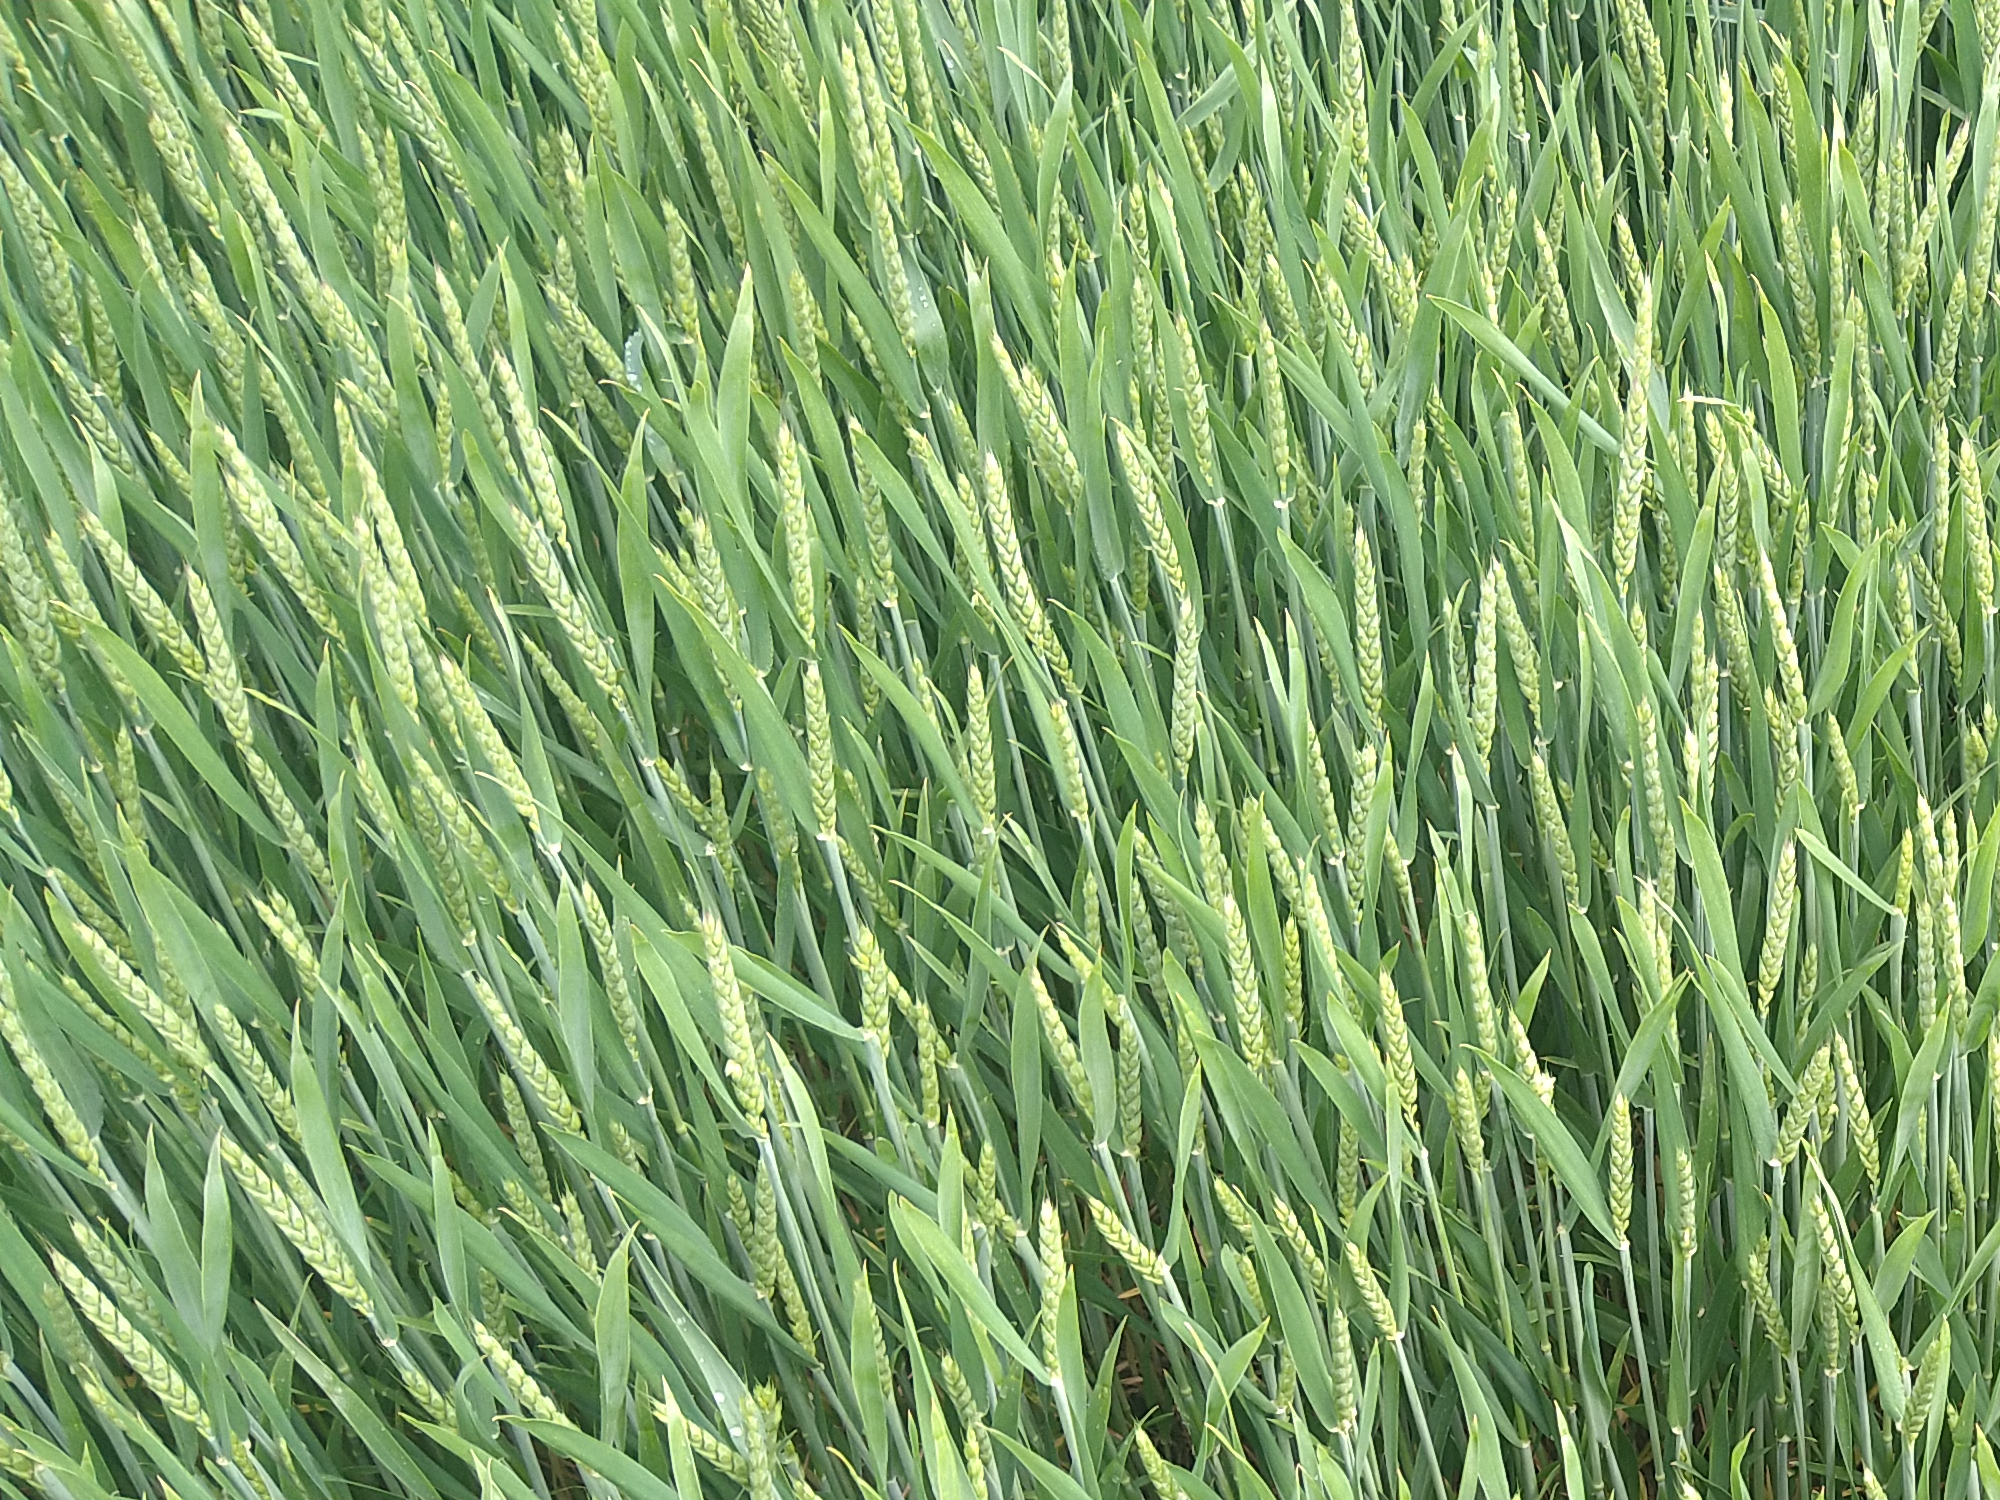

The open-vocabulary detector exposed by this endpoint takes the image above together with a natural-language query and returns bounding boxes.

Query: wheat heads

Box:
[735,1413,781,1500]
[47,776,106,876]
[1172,314,1219,486]
[1061,565,1105,642]
[1676,388,1694,491]
[101,16,189,140]
[224,473,343,631]
[1534,222,1580,383]
[1419,218,1438,259]
[679,891,702,931]
[1959,723,1982,802]
[1053,699,1085,822]
[1489,565,1539,727]
[663,209,729,333]
[842,768,869,823]
[1917,0,1943,51]
[852,441,898,599]
[353,758,395,840]
[1785,500,1808,633]
[1993,979,2000,1103]
[1240,794,1252,859]
[954,120,1002,222]
[1377,969,1417,1115]
[1504,24,1527,134]
[572,358,633,458]
[1031,128,1088,260]
[1119,995,1144,1156]
[443,660,536,836]
[776,430,815,635]
[845,311,914,433]
[758,788,798,854]
[1932,423,1950,573]
[1654,431,1677,593]
[1129,531,1151,608]
[131,233,173,308]
[1460,913,1493,1064]
[1407,419,1425,513]
[0,570,31,637]
[797,272,826,340]
[1308,708,1343,856]
[1742,1248,1787,1338]
[331,643,368,721]
[955,412,987,492]
[1593,129,1603,199]
[404,295,426,364]
[81,929,206,1054]
[1307,260,1325,363]
[385,1341,461,1433]
[1341,1244,1406,1343]
[1512,548,1536,613]
[409,787,479,937]
[239,181,274,292]
[1873,157,1898,293]
[1527,752,1584,903]
[1323,1296,1357,1423]
[1702,409,1735,575]
[534,137,563,197]
[710,768,731,884]
[657,1400,751,1487]
[1797,947,1818,1021]
[757,992,794,1134]
[382,130,409,245]
[557,1189,598,1283]
[58,974,178,1078]
[803,657,838,834]
[381,10,443,116]
[747,292,776,391]
[548,322,585,390]
[912,654,934,722]
[871,195,921,351]
[346,127,385,163]
[1943,1151,1962,1210]
[144,115,222,237]
[1023,962,1088,1119]
[1851,96,1880,207]
[149,435,191,503]
[1426,385,1464,480]
[656,550,715,614]
[1085,1192,1166,1302]
[1446,611,1465,708]
[1842,291,1886,464]
[1908,189,1922,301]
[236,1,332,147]
[1127,381,1145,442]
[470,1255,525,1354]
[1211,1173,1256,1245]
[525,640,607,765]
[461,495,498,593]
[149,0,219,114]
[301,515,352,599]
[1614,279,1651,572]
[942,1350,998,1480]
[1776,1044,1822,1159]
[604,226,627,295]
[1790,0,1812,69]
[1616,0,1646,111]
[1504,1007,1545,1099]
[66,1214,191,1359]
[347,59,384,161]
[0,1003,109,1179]
[266,382,327,505]
[194,0,224,78]
[1910,555,1963,688]
[1866,1462,1910,1500]
[675,546,711,601]
[1831,1032,1876,1195]
[986,467,1079,686]
[352,30,477,208]
[222,1429,270,1500]
[1829,221,1847,369]
[1981,708,2000,778]
[915,997,941,1143]
[1016,369,1086,494]
[1222,169,1248,249]
[44,532,108,632]
[950,0,991,98]
[853,24,902,202]
[848,928,886,1045]
[1322,159,1338,229]
[1547,188,1565,258]
[701,917,767,1129]
[1272,23,1289,124]
[436,274,541,516]
[1748,422,1799,506]
[87,131,119,188]
[789,270,822,391]
[1212,0,1235,43]
[1181,120,1213,218]
[765,166,799,259]
[1052,0,1075,119]
[187,255,253,396]
[1915,898,1935,1035]
[334,399,364,481]
[534,236,548,274]
[1628,0,1665,174]
[409,754,549,904]
[1225,897,1261,1063]
[873,0,906,95]
[63,374,133,473]
[1904,1337,1940,1445]
[573,0,611,101]
[764,0,820,136]
[1340,11,1367,183]
[50,867,137,971]
[952,473,991,627]
[352,0,384,53]
[554,24,606,138]
[210,1003,305,1137]
[653,758,717,840]
[1131,183,1152,272]
[1815,1068,1832,1143]
[82,518,206,677]
[26,188,82,342]
[611,1115,643,1178]
[502,1179,553,1252]
[818,835,897,926]
[1737,462,1750,563]
[1915,793,1940,887]
[1758,555,1813,719]
[42,1281,96,1395]
[274,473,357,549]
[1941,810,1965,893]
[357,464,429,614]
[1,474,55,592]
[1241,0,1257,48]
[1338,1064,1360,1222]
[0,766,13,804]
[29,659,72,707]
[372,225,391,306]
[1471,212,1494,270]
[545,285,629,380]
[1170,600,1199,777]
[849,214,881,297]
[1819,1270,1847,1370]
[267,891,313,1030]
[115,720,149,839]
[1308,605,1343,707]
[446,1170,481,1223]
[1933,269,1965,410]
[87,274,127,408]
[236,155,327,327]
[772,1240,811,1350]
[1399,255,1416,320]
[1718,66,1735,155]
[250,902,322,983]
[1340,192,1411,336]
[690,100,752,272]
[1247,195,1262,306]
[1385,824,1410,891]
[393,586,467,764]
[991,340,1075,512]
[1747,836,1793,1016]
[1317,264,1379,392]
[1002,440,1016,494]
[190,291,250,356]
[1203,113,1225,152]
[1963,128,2000,320]
[448,220,479,287]
[558,134,585,246]
[1767,496,1790,552]
[1271,1340,1294,1414]
[468,978,576,1135]
[1712,570,1747,721]
[1695,39,1705,96]
[1891,830,1910,908]
[1109,417,1192,598]
[509,508,620,682]
[1238,168,1280,251]
[554,236,579,299]
[968,663,998,811]
[858,586,882,711]
[0,156,58,322]
[1130,277,1157,392]
[859,1262,890,1392]
[1805,1188,1853,1328]
[755,1390,779,1448]
[183,571,253,746]
[1994,804,2000,926]
[0,12,33,80]
[1975,1,2000,70]
[423,0,457,74]
[1132,838,1202,969]
[1045,176,1065,358]
[321,293,396,413]
[1765,707,1797,818]
[1126,874,1176,1036]
[1672,1146,1695,1246]
[1190,801,1232,906]
[1502,410,1536,564]
[739,0,785,87]
[452,592,503,668]
[1934,893,1970,1019]
[273,1436,305,1494]
[237,740,342,910]
[1353,531,1381,700]
[44,1246,206,1433]
[746,1153,775,1309]
[1471,571,1495,759]
[435,383,450,467]
[1486,164,1498,216]
[82,1048,130,1079]
[1254,799,1307,928]
[468,1327,578,1429]
[1853,468,1871,551]
[840,43,882,197]
[495,358,563,534]
[959,1429,992,1500]
[1134,1429,1218,1500]
[1688,605,1706,739]
[1149,344,1176,487]
[1777,201,1820,374]
[1765,61,1806,206]
[1256,326,1288,474]
[881,968,952,1064]
[1260,250,1302,359]
[1486,186,1520,304]
[138,197,205,319]
[1984,1014,2000,1173]
[581,885,640,1067]
[690,521,734,652]
[1958,435,1993,603]
[1698,659,1717,795]
[1892,546,1917,666]
[345,390,398,468]
[1285,912,1301,1045]
[358,128,382,225]
[151,929,201,1080]
[1337,743,1377,901]
[489,1071,553,1210]
[1173,1004,1198,1080]
[1611,1087,1634,1230]
[1630,600,1648,669]
[1455,1065,1481,1166]
[1910,117,1968,279]
[1271,1195,1329,1294]
[0,504,68,691]
[394,784,417,828]
[1037,1201,1075,1360]
[1618,213,1648,301]
[1827,408,1853,525]
[898,0,936,128]
[979,1137,998,1268]
[716,1165,760,1252]
[1636,699,1676,940]
[905,431,935,462]
[0,1126,27,1143]
[220,1143,368,1316]
[1824,713,1856,805]
[1085,871,1105,963]
[359,541,419,714]
[1891,140,1916,314]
